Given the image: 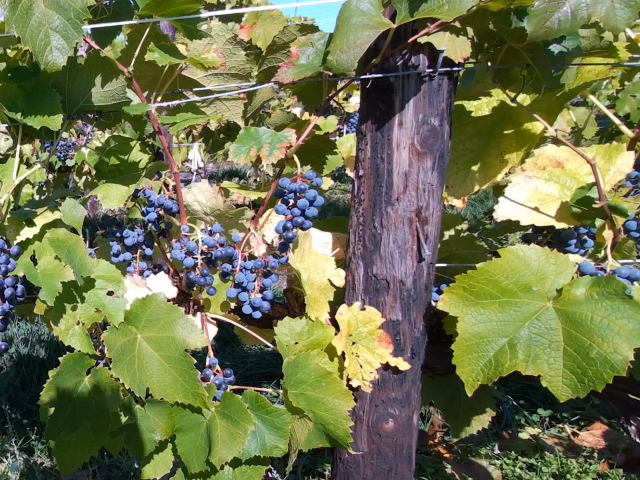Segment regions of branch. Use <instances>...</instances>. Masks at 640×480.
Masks as SVG:
<instances>
[{"instance_id": "branch-1", "label": "branch", "mask_w": 640, "mask_h": 480, "mask_svg": "<svg viewBox=\"0 0 640 480\" xmlns=\"http://www.w3.org/2000/svg\"><path fill=\"white\" fill-rule=\"evenodd\" d=\"M499 90L507 97L509 98L514 104L522 107L526 112H528L529 114H532L535 119L543 126L547 129V131L550 133V135L555 139V140H559L561 141L566 147H568L576 156H578L579 158H582L583 160L588 161V164L590 166V169L592 170L593 173V177H594V182H595V187L600 199V203L602 206V210L605 214V216L607 217V220L609 221V224L611 225V228L614 232V240L617 242H621L622 238L619 236V230L616 226V223L612 217V213L609 212L608 207H607V203L601 188V184H600V180H599V174H598V170L595 166V163L593 161V159L580 152L571 142H569L568 140H566L565 137L556 134V132L554 131V129L551 127V125L546 122L544 119H542V117L539 115V113L530 108L526 103L520 101L519 99L515 98L507 89H505L504 86H500Z\"/></svg>"}, {"instance_id": "branch-2", "label": "branch", "mask_w": 640, "mask_h": 480, "mask_svg": "<svg viewBox=\"0 0 640 480\" xmlns=\"http://www.w3.org/2000/svg\"><path fill=\"white\" fill-rule=\"evenodd\" d=\"M353 84L352 80L347 81L346 83L342 84L338 89H336L329 97H327L322 103L321 105L318 107L315 115L312 117L311 121H310V125L307 126V128L305 129V131L303 132V134L301 135V137L299 138V140L289 149V151L287 152L283 162L281 163V166L276 174V176L273 179V184L271 185V187L269 188V190L267 191V194L262 202V204L260 205V209L257 211V214L255 215L253 221L251 222V224L248 225V230L252 231L253 229L256 228L257 223L259 222L263 211L265 210L266 206L268 205L271 196L273 194V192L275 191V189L277 188L278 182L280 180V178L282 177L287 164L289 163L291 156L293 155V153L303 144V142L305 141V139L307 138V136L309 135L310 131L312 130V127L315 126V123L317 122V120L319 119V117L321 116L322 111L324 110V108L332 101L334 100L341 92H343L345 89L349 88L351 85Z\"/></svg>"}, {"instance_id": "branch-3", "label": "branch", "mask_w": 640, "mask_h": 480, "mask_svg": "<svg viewBox=\"0 0 640 480\" xmlns=\"http://www.w3.org/2000/svg\"><path fill=\"white\" fill-rule=\"evenodd\" d=\"M147 116H148L149 120L152 122L153 128H154L155 132L157 133V136L160 139V142H161V144H162V146H163V148L165 150L166 156H167V158H168V160H169V162H170V164L172 166L173 177H174V180H175V186H176V190H177V201H178V204H179V207H180V216H181L180 224L184 225V224L187 223V220H186V214H185V204H184V201H183V198H182V187H181V184H180V177H179L178 167H177L176 161H175L174 157L171 154L169 145H168V143H167V141H166V139H165V137H164V135L162 133V130L160 129V127L158 125V122H157L156 118L154 117L151 109L147 110Z\"/></svg>"}, {"instance_id": "branch-4", "label": "branch", "mask_w": 640, "mask_h": 480, "mask_svg": "<svg viewBox=\"0 0 640 480\" xmlns=\"http://www.w3.org/2000/svg\"><path fill=\"white\" fill-rule=\"evenodd\" d=\"M442 24L441 20H437L434 23H432L431 25H429L427 28L417 32L416 34L412 35L410 38H408L407 40H405L404 42L400 43L399 45H397L396 47H394L393 49L389 50L388 52L384 53L383 55H381L380 57H378L376 60L372 61L371 63L367 64L365 67H363L361 70L358 71V75L359 74H364L366 73L368 70H370L371 68L375 67L376 65L380 64L381 62H383L385 59H387L388 57L392 56L393 54H395L396 52H398L399 50L407 47L409 44H411L413 41L417 40L418 38L422 37L423 35L429 33L430 31H432L433 29L437 28L439 25Z\"/></svg>"}, {"instance_id": "branch-5", "label": "branch", "mask_w": 640, "mask_h": 480, "mask_svg": "<svg viewBox=\"0 0 640 480\" xmlns=\"http://www.w3.org/2000/svg\"><path fill=\"white\" fill-rule=\"evenodd\" d=\"M115 65L117 66V68L123 72L126 77L128 78V81L130 83V85L132 86V88L134 89V91L136 92L137 96L140 98L142 103L146 102V97L144 96V94L142 93V91L140 90V88L138 87V85L136 84L133 75L120 63L119 60L115 61Z\"/></svg>"}, {"instance_id": "branch-6", "label": "branch", "mask_w": 640, "mask_h": 480, "mask_svg": "<svg viewBox=\"0 0 640 480\" xmlns=\"http://www.w3.org/2000/svg\"><path fill=\"white\" fill-rule=\"evenodd\" d=\"M200 317L202 322V332L205 337L206 350H207V353H210V356H212L213 351H212L211 342H210V334L207 329V319H206V314L204 309L200 310Z\"/></svg>"}, {"instance_id": "branch-7", "label": "branch", "mask_w": 640, "mask_h": 480, "mask_svg": "<svg viewBox=\"0 0 640 480\" xmlns=\"http://www.w3.org/2000/svg\"><path fill=\"white\" fill-rule=\"evenodd\" d=\"M82 39L88 43L89 45H91L97 52L101 51V47L99 44H97L94 40H92L91 38L87 37L86 35L82 36Z\"/></svg>"}]
</instances>
